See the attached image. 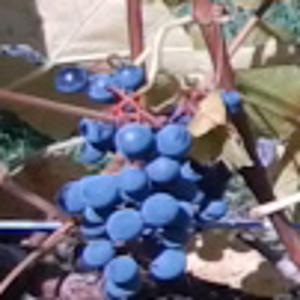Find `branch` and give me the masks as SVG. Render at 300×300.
I'll use <instances>...</instances> for the list:
<instances>
[{
	"label": "branch",
	"mask_w": 300,
	"mask_h": 300,
	"mask_svg": "<svg viewBox=\"0 0 300 300\" xmlns=\"http://www.w3.org/2000/svg\"><path fill=\"white\" fill-rule=\"evenodd\" d=\"M192 14L196 17V27L205 49L210 54L214 76L224 91L233 88L237 73L229 53L222 41L219 25L215 20L211 0H190Z\"/></svg>",
	"instance_id": "obj_1"
},
{
	"label": "branch",
	"mask_w": 300,
	"mask_h": 300,
	"mask_svg": "<svg viewBox=\"0 0 300 300\" xmlns=\"http://www.w3.org/2000/svg\"><path fill=\"white\" fill-rule=\"evenodd\" d=\"M228 124L233 125L242 138L247 149V158L251 161L257 160L254 168L251 166L239 167L240 178L253 193V200L257 205L273 206L277 201V194L265 177L269 165L265 161L257 142L253 139L249 121L243 116L233 115L229 118Z\"/></svg>",
	"instance_id": "obj_2"
},
{
	"label": "branch",
	"mask_w": 300,
	"mask_h": 300,
	"mask_svg": "<svg viewBox=\"0 0 300 300\" xmlns=\"http://www.w3.org/2000/svg\"><path fill=\"white\" fill-rule=\"evenodd\" d=\"M128 41L126 43V53L132 60L139 59L142 54L143 29H144V9L143 0H128Z\"/></svg>",
	"instance_id": "obj_3"
},
{
	"label": "branch",
	"mask_w": 300,
	"mask_h": 300,
	"mask_svg": "<svg viewBox=\"0 0 300 300\" xmlns=\"http://www.w3.org/2000/svg\"><path fill=\"white\" fill-rule=\"evenodd\" d=\"M270 221L283 239L291 263L296 267H300V235L281 211L273 212Z\"/></svg>",
	"instance_id": "obj_4"
}]
</instances>
